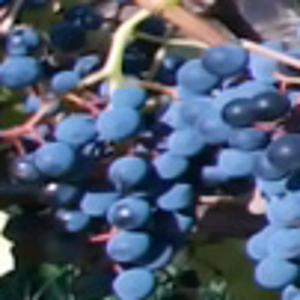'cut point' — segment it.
<instances>
[{
    "label": "cut point",
    "instance_id": "obj_1",
    "mask_svg": "<svg viewBox=\"0 0 300 300\" xmlns=\"http://www.w3.org/2000/svg\"><path fill=\"white\" fill-rule=\"evenodd\" d=\"M149 12L141 9L133 13L126 23L121 24L111 36L106 51V62L102 69L91 72L80 81L82 88H88L97 80L109 77L114 86L122 84V50L128 46L137 31V24L147 18Z\"/></svg>",
    "mask_w": 300,
    "mask_h": 300
}]
</instances>
